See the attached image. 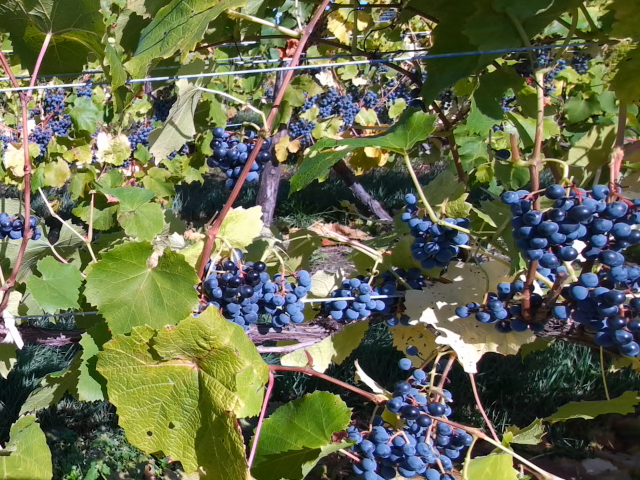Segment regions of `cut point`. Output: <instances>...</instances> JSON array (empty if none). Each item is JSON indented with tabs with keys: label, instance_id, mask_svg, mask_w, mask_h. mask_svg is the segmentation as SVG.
Here are the masks:
<instances>
[{
	"label": "cut point",
	"instance_id": "cut-point-1",
	"mask_svg": "<svg viewBox=\"0 0 640 480\" xmlns=\"http://www.w3.org/2000/svg\"><path fill=\"white\" fill-rule=\"evenodd\" d=\"M545 162H559L561 164H563L564 166V176L568 177L569 176V164L568 161L561 158V157H543V158H538L537 159V163L541 164V163H545Z\"/></svg>",
	"mask_w": 640,
	"mask_h": 480
},
{
	"label": "cut point",
	"instance_id": "cut-point-4",
	"mask_svg": "<svg viewBox=\"0 0 640 480\" xmlns=\"http://www.w3.org/2000/svg\"><path fill=\"white\" fill-rule=\"evenodd\" d=\"M379 267H380V260L376 259L375 260V264H374V268L372 269V273L369 276V282L370 283L374 282V279H375V277L377 275V272L379 271Z\"/></svg>",
	"mask_w": 640,
	"mask_h": 480
},
{
	"label": "cut point",
	"instance_id": "cut-point-3",
	"mask_svg": "<svg viewBox=\"0 0 640 480\" xmlns=\"http://www.w3.org/2000/svg\"><path fill=\"white\" fill-rule=\"evenodd\" d=\"M211 237H212V238H216V239H218V240L223 241L224 243H226V244L228 245V247H229V250H230V251H233V250H234L233 242H232L230 239L226 238L225 236H222V235H220V234H218V233H212V234H211Z\"/></svg>",
	"mask_w": 640,
	"mask_h": 480
},
{
	"label": "cut point",
	"instance_id": "cut-point-2",
	"mask_svg": "<svg viewBox=\"0 0 640 480\" xmlns=\"http://www.w3.org/2000/svg\"><path fill=\"white\" fill-rule=\"evenodd\" d=\"M246 128L251 129V130H255L259 134L263 133V129L260 126H258L256 122H243L241 124V128L239 129V135L240 136L244 135V132L246 131Z\"/></svg>",
	"mask_w": 640,
	"mask_h": 480
}]
</instances>
